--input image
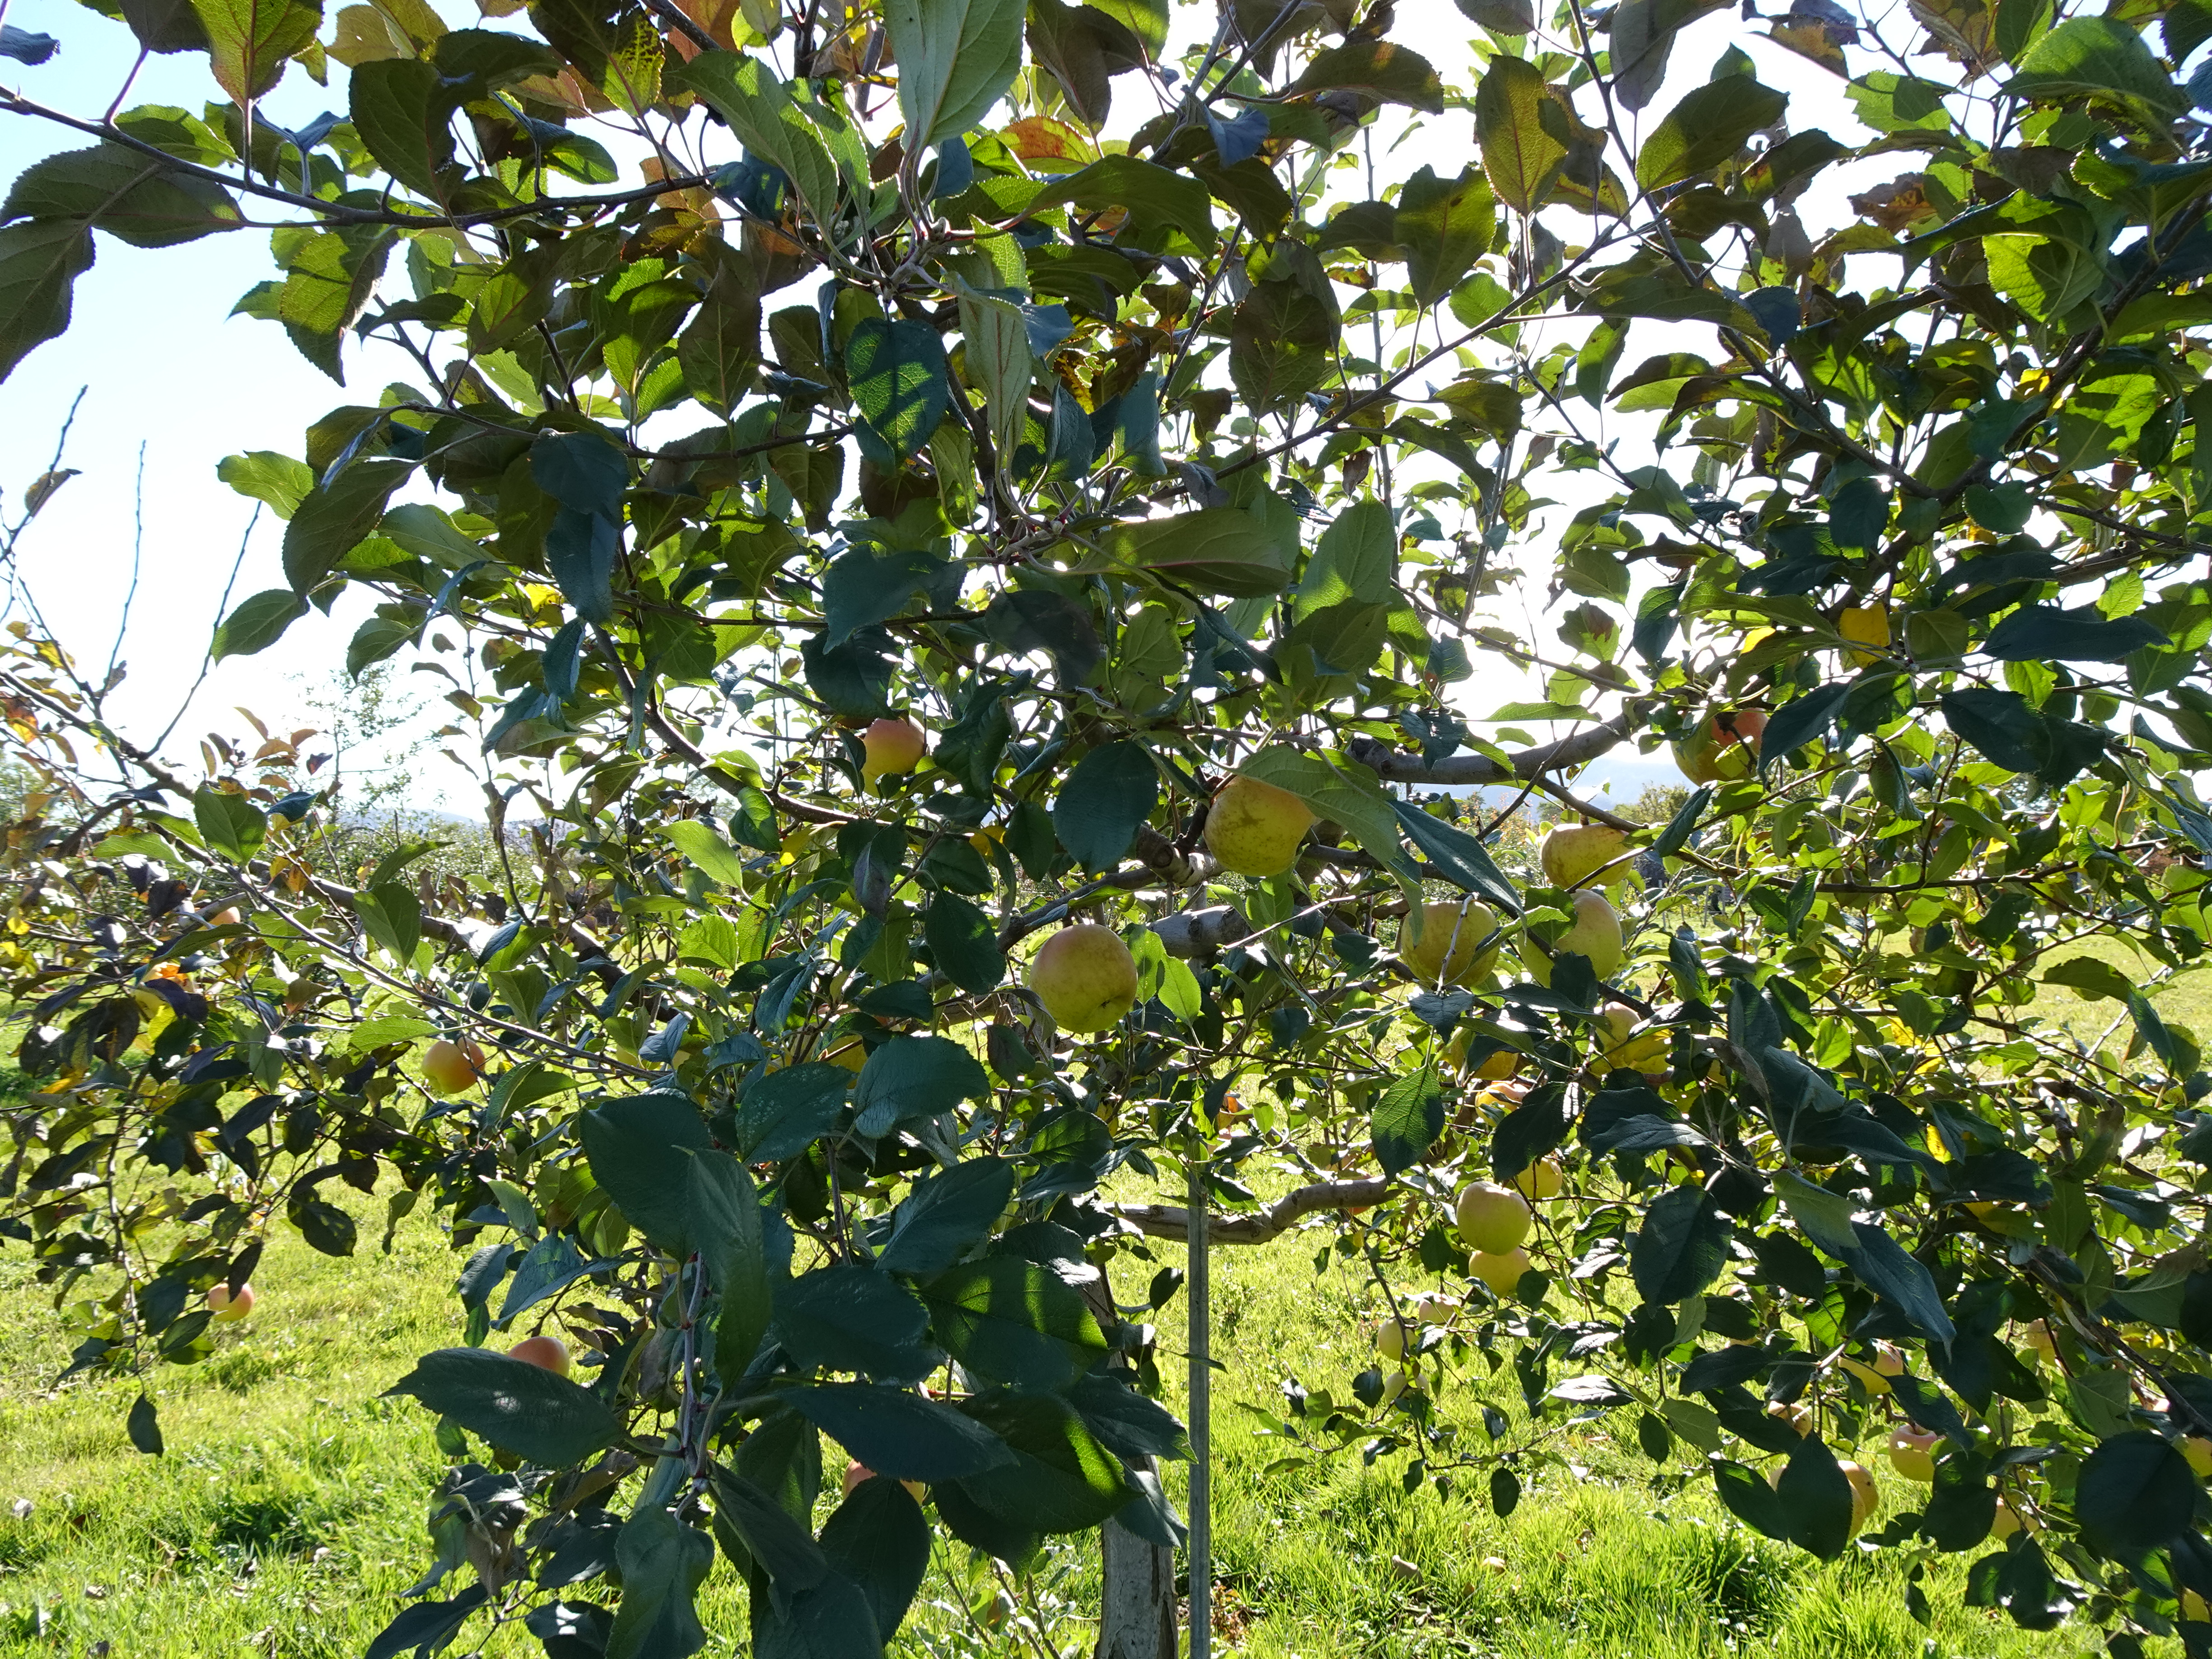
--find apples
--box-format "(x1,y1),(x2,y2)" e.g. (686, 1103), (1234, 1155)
(1730, 1282), (1768, 1317)
(2034, 875), (2081, 914)
(821, 196), (843, 218)
(413, 971), (452, 1011)
(687, 1082), (725, 1116)
(1457, 1181), (1532, 1258)
(2184, 1577), (2212, 1624)
(324, 325), (346, 345)
(310, 913), (344, 946)
(553, 1010), (591, 1046)
(1594, 999), (1643, 1050)
(2026, 1313), (2084, 1371)
(1468, 1242), (1536, 1302)
(1696, 704), (1778, 784)
(1217, 230), (1251, 260)
(132, 980), (186, 1027)
(59, 936), (97, 967)
(1202, 763), (1321, 879)
(1076, 1090), (1121, 1144)
(1474, 1081), (1532, 1126)
(661, 798), (697, 830)
(845, 1005), (892, 1048)
(1657, 975), (1695, 1010)
(1838, 1338), (1904, 1395)
(2120, 1332), (2154, 1367)
(1984, 1486), (2040, 1550)
(1766, 1403), (1815, 1447)
(506, 1337), (571, 1392)
(1819, 1462), (1881, 1521)
(1540, 822), (1636, 892)
(1401, 899), (1501, 990)
(616, 1025), (664, 1078)
(1888, 1416), (1955, 1482)
(780, 796), (843, 855)
(1422, 664), (1448, 693)
(757, 1158), (778, 1174)
(817, 1035), (887, 1094)
(1962, 1193), (2001, 1230)
(1933, 812), (1980, 853)
(1508, 1145), (1564, 1201)
(1333, 1166), (1376, 1219)
(1377, 1314), (1425, 1360)
(1728, 1334), (1765, 1373)
(1911, 925), (1954, 963)
(2169, 1424), (2212, 1480)
(208, 1280), (253, 1324)
(419, 1034), (485, 1097)
(1815, 1164), (1840, 1186)
(1797, 1475), (1868, 1543)
(2002, 1462), (2043, 1505)
(1207, 1126), (1252, 1168)
(784, 1025), (847, 1070)
(1384, 1366), (1431, 1412)
(857, 751), (920, 801)
(863, 708), (931, 776)
(815, 1001), (845, 1026)
(1029, 923), (1140, 1036)
(668, 1033), (718, 1081)
(842, 1448), (926, 1531)
(5, 822), (38, 853)
(1630, 1052), (1672, 1095)
(1513, 887), (1623, 989)
(1097, 194), (1139, 238)
(184, 888), (242, 952)
(861, 450), (941, 531)
(1449, 1017), (1519, 1080)
(1420, 1290), (1464, 1327)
